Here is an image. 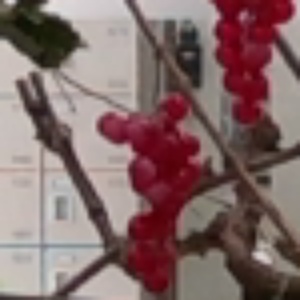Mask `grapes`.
<instances>
[{"mask_svg":"<svg viewBox=\"0 0 300 300\" xmlns=\"http://www.w3.org/2000/svg\"><path fill=\"white\" fill-rule=\"evenodd\" d=\"M191 113V99L182 91H171L152 115L107 111L94 121L96 133L111 145L130 146L135 155L126 166L130 187L152 205V211L135 213L126 224L131 238L128 269L152 294L170 285L169 269L178 259L172 244L178 234L176 221L203 179L201 167L189 160L202 150L201 138L184 132Z\"/></svg>","mask_w":300,"mask_h":300,"instance_id":"grapes-1","label":"grapes"},{"mask_svg":"<svg viewBox=\"0 0 300 300\" xmlns=\"http://www.w3.org/2000/svg\"><path fill=\"white\" fill-rule=\"evenodd\" d=\"M220 17L213 34L220 43L214 52L216 64L227 70L222 84L235 97L231 105L234 120L252 125L263 115L269 95V78L262 69L273 59L269 46L276 36V24L291 22L297 13L294 0H208Z\"/></svg>","mask_w":300,"mask_h":300,"instance_id":"grapes-2","label":"grapes"}]
</instances>
